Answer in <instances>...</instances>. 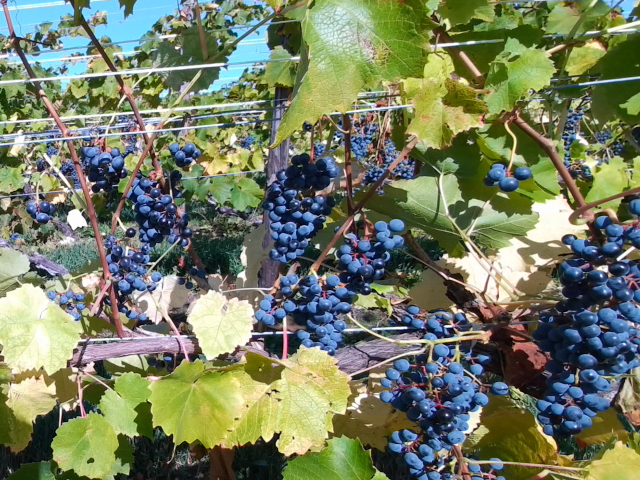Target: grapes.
<instances>
[{"mask_svg": "<svg viewBox=\"0 0 640 480\" xmlns=\"http://www.w3.org/2000/svg\"><path fill=\"white\" fill-rule=\"evenodd\" d=\"M593 224L608 234L602 250L588 239L571 234L562 237L575 253L559 263L558 282L563 284L562 293L567 299L557 304V310L567 313L540 314L542 325L531 333L534 340H539L537 347L549 352L551 358L546 369L553 378L545 380V387L551 391L536 403L540 412L536 421L546 435L555 433L554 425L563 437L591 428V417L610 408V400L597 392H608L612 381L600 375H622L640 367V329L630 324H640V307L632 302L640 303V288L628 287L625 279L629 275L640 283V264L633 259L613 262L609 265L610 278L602 270H594V266L606 262L605 257L618 258L625 240L640 249V228L624 229L608 215L597 216ZM612 296L621 301L618 307H604L598 313L586 309ZM566 361L573 363L568 371H564ZM577 367L582 382L575 386ZM564 393L574 398L576 406L559 402Z\"/></svg>", "mask_w": 640, "mask_h": 480, "instance_id": "obj_1", "label": "grapes"}, {"mask_svg": "<svg viewBox=\"0 0 640 480\" xmlns=\"http://www.w3.org/2000/svg\"><path fill=\"white\" fill-rule=\"evenodd\" d=\"M455 343L436 344L433 348V357L430 362L425 363L426 370L435 374L438 371V361L440 365H448L449 359L455 355ZM395 369H385L387 377H382L380 383L384 387H391L393 381L404 389H394L393 391H381L380 401L384 404L391 403L394 408L406 412V418L411 422H418L419 426L428 434L431 439L427 444L418 446L419 454L406 452L404 444L406 442H416L419 434L411 429L394 431L388 442V449L391 452L404 454V460L411 467L409 473L417 476V480H453L457 474L451 471L438 473L437 471H426L425 464L435 462V452L451 450L453 444L465 442V433L469 430L470 413L478 412L479 407L489 405V396L485 392H477L479 383L472 381L466 376L464 365L461 363H450L449 372L443 377H435L432 380L434 387L445 388L448 385L450 395H442L440 403L444 409L437 407L438 402L434 396L427 397V393L422 387H414L409 379L401 376L399 372H407L411 369V362L406 358H398L394 361Z\"/></svg>", "mask_w": 640, "mask_h": 480, "instance_id": "obj_2", "label": "grapes"}, {"mask_svg": "<svg viewBox=\"0 0 640 480\" xmlns=\"http://www.w3.org/2000/svg\"><path fill=\"white\" fill-rule=\"evenodd\" d=\"M377 243L372 245L368 239L359 240V236L354 233L347 235L353 237L357 242V250L365 252V256L370 258V262H365L362 257L354 259L351 240L344 238L346 244H342L335 251L338 258V267L342 269L340 275L331 274L326 278L329 287L338 286L335 291L328 290L326 296L322 297L323 288L318 284L315 275H306L303 278L305 285L299 287V294L308 301H299L296 298H288L283 302V309L277 308L272 311V304L275 298L266 295L259 303V308L255 312V318L262 321L267 326H273L277 319L285 318L288 313L298 311L301 314L310 313V317L305 320L306 326L314 330L319 342L311 339L308 330L300 328L297 331V338L305 348L319 346L321 351H327L333 356L338 347V343L344 341V329L347 323L342 318H337L342 314H347L352 309L353 295L358 292L365 296L371 294V287L374 280L385 275V266L391 260L392 250L403 247L406 244L405 238L401 234L391 235L392 232H399L405 229V221L400 217H394L389 223L378 220L374 224Z\"/></svg>", "mask_w": 640, "mask_h": 480, "instance_id": "obj_3", "label": "grapes"}, {"mask_svg": "<svg viewBox=\"0 0 640 480\" xmlns=\"http://www.w3.org/2000/svg\"><path fill=\"white\" fill-rule=\"evenodd\" d=\"M307 153L294 155L292 165L287 170H279L268 190L262 207L268 213L272 238L278 240L269 256L275 262L287 263L305 253L310 245L308 238H313L323 222L336 206L332 196L318 195L296 201L298 189L308 190L310 185L323 190L331 183V179L341 174V168L335 165L332 157H324L309 163Z\"/></svg>", "mask_w": 640, "mask_h": 480, "instance_id": "obj_4", "label": "grapes"}, {"mask_svg": "<svg viewBox=\"0 0 640 480\" xmlns=\"http://www.w3.org/2000/svg\"><path fill=\"white\" fill-rule=\"evenodd\" d=\"M131 186L133 190L128 192L126 198L135 207L134 220L140 226L138 231L141 233L138 241L144 245L137 252L129 250L127 256L126 250L116 243V236L110 234L105 237L104 246L108 251L106 256L111 278L117 279V289L121 292L117 301L119 312L126 313V317L130 320L138 318L140 321H147L148 315L146 313L139 314L137 310L128 311V307L124 305L125 296L131 294L135 289L154 291L157 284L152 283L149 286L135 274H127L124 277V273L127 271L136 272L144 276L148 273V267L143 264L150 262L149 251L151 247L162 243L164 235H168L170 243L186 247L188 238L193 235V230L187 228L189 214L181 212L180 218H178L176 215L178 207L172 203V195H163L160 189L155 188L157 186L156 180L151 181L149 178H143L142 173H137Z\"/></svg>", "mask_w": 640, "mask_h": 480, "instance_id": "obj_5", "label": "grapes"}, {"mask_svg": "<svg viewBox=\"0 0 640 480\" xmlns=\"http://www.w3.org/2000/svg\"><path fill=\"white\" fill-rule=\"evenodd\" d=\"M81 153L86 156L85 161L92 164L88 173V179L92 186V191L98 193L102 190L112 191L113 185H118L121 179L128 175V170L123 169L124 157L120 148H113L109 153H101L99 147L83 146Z\"/></svg>", "mask_w": 640, "mask_h": 480, "instance_id": "obj_6", "label": "grapes"}, {"mask_svg": "<svg viewBox=\"0 0 640 480\" xmlns=\"http://www.w3.org/2000/svg\"><path fill=\"white\" fill-rule=\"evenodd\" d=\"M532 177V170L524 165H518L512 172V176L506 177V165L503 162H495L489 166L483 185L485 187L499 185L503 193H512L518 188L519 181H526Z\"/></svg>", "mask_w": 640, "mask_h": 480, "instance_id": "obj_7", "label": "grapes"}, {"mask_svg": "<svg viewBox=\"0 0 640 480\" xmlns=\"http://www.w3.org/2000/svg\"><path fill=\"white\" fill-rule=\"evenodd\" d=\"M430 313H446L447 315H435V317H431L426 321V327L431 331L427 332L424 335V338L429 339H438V338H447V337H455V329H448L441 321L437 319H443L444 321H449L453 319V313H449L448 310L445 309H432Z\"/></svg>", "mask_w": 640, "mask_h": 480, "instance_id": "obj_8", "label": "grapes"}, {"mask_svg": "<svg viewBox=\"0 0 640 480\" xmlns=\"http://www.w3.org/2000/svg\"><path fill=\"white\" fill-rule=\"evenodd\" d=\"M169 152L174 154L176 165L179 167H185L201 156V150L196 148L195 143H187L183 149L178 143H172L169 145Z\"/></svg>", "mask_w": 640, "mask_h": 480, "instance_id": "obj_9", "label": "grapes"}, {"mask_svg": "<svg viewBox=\"0 0 640 480\" xmlns=\"http://www.w3.org/2000/svg\"><path fill=\"white\" fill-rule=\"evenodd\" d=\"M26 212L39 223H49L53 219L55 206L48 200H42L39 206L34 200H29L26 205Z\"/></svg>", "mask_w": 640, "mask_h": 480, "instance_id": "obj_10", "label": "grapes"}, {"mask_svg": "<svg viewBox=\"0 0 640 480\" xmlns=\"http://www.w3.org/2000/svg\"><path fill=\"white\" fill-rule=\"evenodd\" d=\"M406 312L401 317V320L405 324H411L418 330L425 329V320L415 318V314L421 312V308L418 305H409L406 307Z\"/></svg>", "mask_w": 640, "mask_h": 480, "instance_id": "obj_11", "label": "grapes"}, {"mask_svg": "<svg viewBox=\"0 0 640 480\" xmlns=\"http://www.w3.org/2000/svg\"><path fill=\"white\" fill-rule=\"evenodd\" d=\"M476 359L480 363H474L469 366L470 373L476 376H481L485 372L483 364H488L493 361V355L490 352H480L476 354Z\"/></svg>", "mask_w": 640, "mask_h": 480, "instance_id": "obj_12", "label": "grapes"}, {"mask_svg": "<svg viewBox=\"0 0 640 480\" xmlns=\"http://www.w3.org/2000/svg\"><path fill=\"white\" fill-rule=\"evenodd\" d=\"M281 293L284 296H290L292 294L291 285H296L299 282V277L296 272H292L287 277H281L279 279Z\"/></svg>", "mask_w": 640, "mask_h": 480, "instance_id": "obj_13", "label": "grapes"}, {"mask_svg": "<svg viewBox=\"0 0 640 480\" xmlns=\"http://www.w3.org/2000/svg\"><path fill=\"white\" fill-rule=\"evenodd\" d=\"M86 298L85 293H74L72 290L67 291L64 294L59 295L60 303L67 304L69 300L83 301Z\"/></svg>", "mask_w": 640, "mask_h": 480, "instance_id": "obj_14", "label": "grapes"}, {"mask_svg": "<svg viewBox=\"0 0 640 480\" xmlns=\"http://www.w3.org/2000/svg\"><path fill=\"white\" fill-rule=\"evenodd\" d=\"M74 308H75L74 304L67 305V311L69 312V314L74 318L75 321H80L81 313L79 311H84L86 309V305L83 302H80L76 304V309L78 311H74L73 310Z\"/></svg>", "mask_w": 640, "mask_h": 480, "instance_id": "obj_15", "label": "grapes"}]
</instances>
